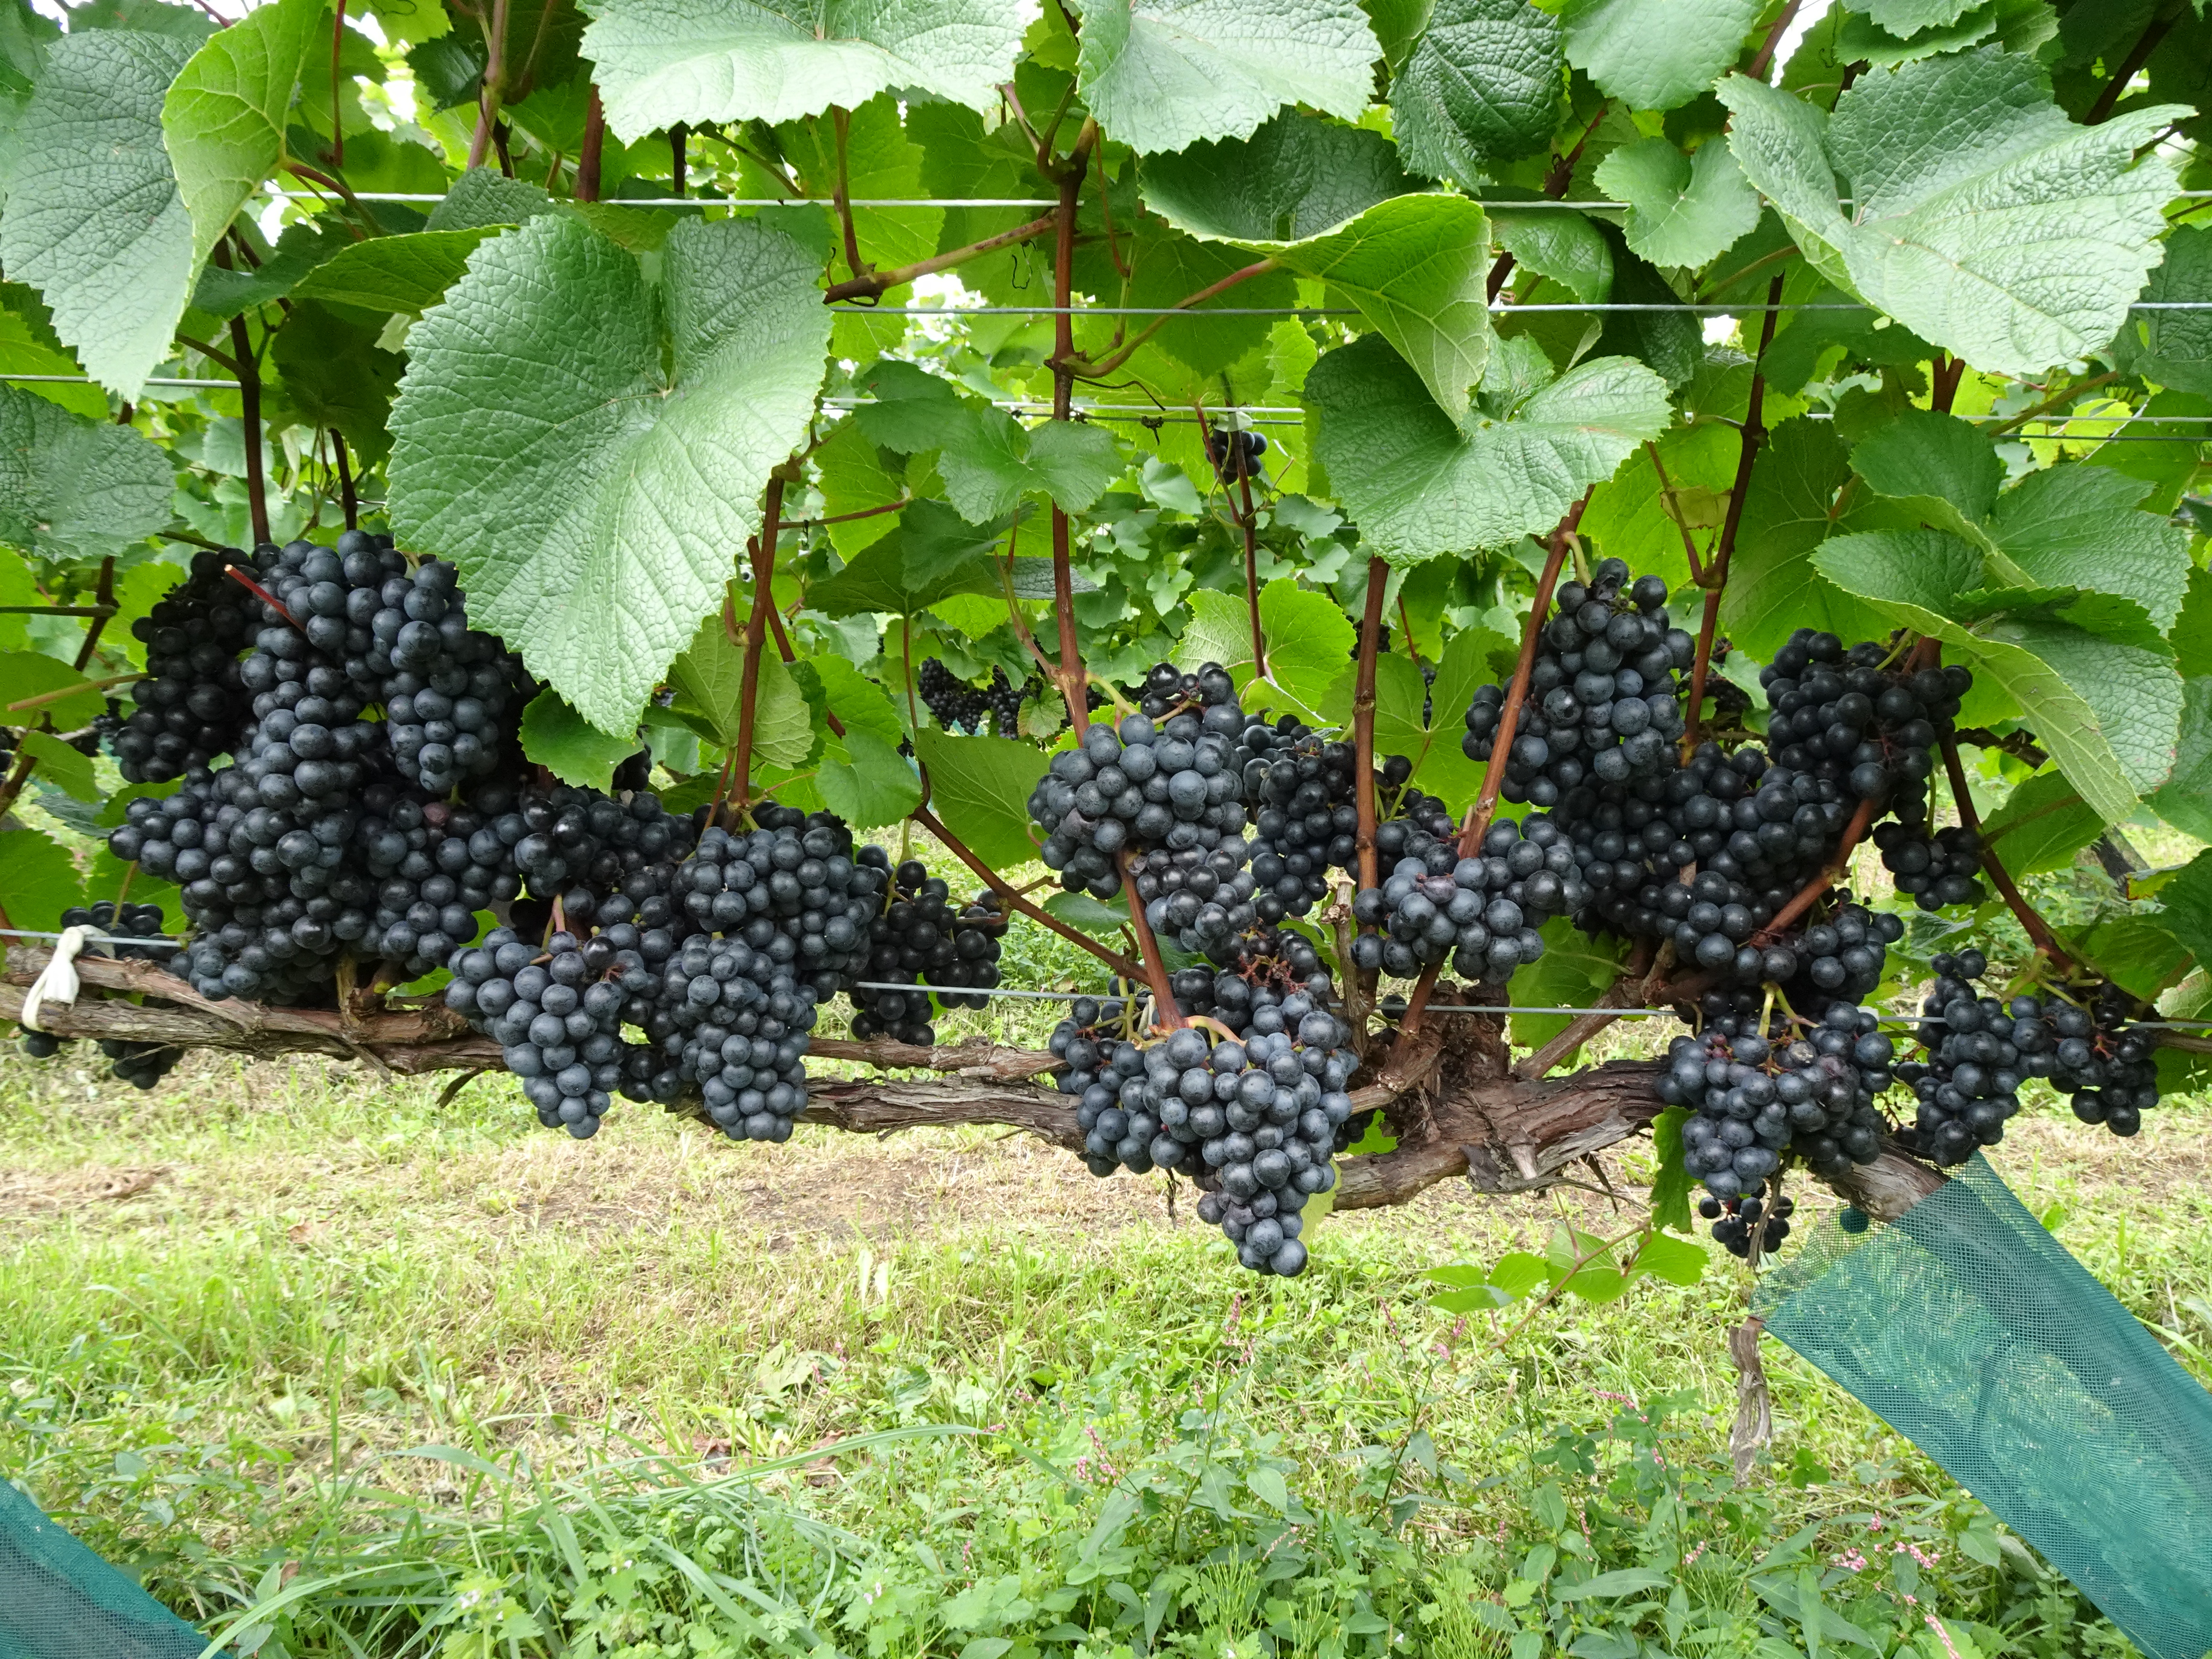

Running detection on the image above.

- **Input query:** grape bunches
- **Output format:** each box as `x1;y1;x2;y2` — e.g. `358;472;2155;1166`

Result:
517;785;695;962
1202;429;1268;486
1026;661;1257;969
1831;1186;1869;1234
264;947;335;1006
922;879;1009;1009
1699;1177;1794;1256
1143;929;1360;1278
1792;999;1895;1182
241;542;379;806
611;729;653;791
2047;992;2159;1137
108;766;306;1000
692;801;833;833
113;544;282;784
1797;889;1905;1015
1672;982;1768;1024
622;1045;695;1108
1454;813;1583;986
1683;899;1796;982
1463;672;1583;806
1236;715;1354;926
1328;754;1446;882
333;528;548;794
218;750;367;959
0;732;8;770
1895;952;2058;1167
61;901;186;1090
1824;668;1987;911
1652;1009;1793;1199
1758;628;1902;817
1049;978;1162;1179
1550;740;1837;946
671;827;877;1004
851;843;947;1050
443;923;662;1139
350;777;522;973
18;1022;67;1056
1350;812;1488;977
1526;559;1697;782
652;935;817;1142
